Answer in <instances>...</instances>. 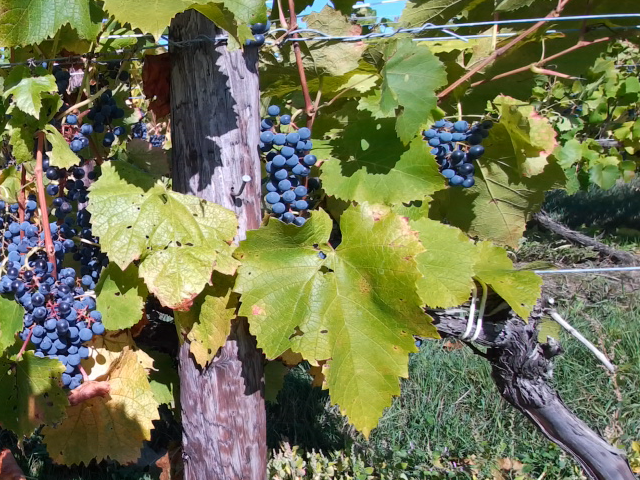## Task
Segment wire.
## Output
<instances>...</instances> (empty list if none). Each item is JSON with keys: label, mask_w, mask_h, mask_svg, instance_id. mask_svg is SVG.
Masks as SVG:
<instances>
[{"label": "wire", "mask_w": 640, "mask_h": 480, "mask_svg": "<svg viewBox=\"0 0 640 480\" xmlns=\"http://www.w3.org/2000/svg\"><path fill=\"white\" fill-rule=\"evenodd\" d=\"M639 12L614 13V14H573L560 16H533L501 19H479L467 23H451L449 25H426L411 29H397L383 32H370L366 34H323L311 36H291L282 38H267V45H284L293 43H313L325 41H368L372 39L394 38L399 36H413L428 32H451L453 30H469L477 27H494L503 25L535 24V23H562L575 21H616L639 19Z\"/></svg>", "instance_id": "d2f4af69"}, {"label": "wire", "mask_w": 640, "mask_h": 480, "mask_svg": "<svg viewBox=\"0 0 640 480\" xmlns=\"http://www.w3.org/2000/svg\"><path fill=\"white\" fill-rule=\"evenodd\" d=\"M227 37L225 35L217 36H199L190 39L170 40L162 42H152L143 45H137L132 47H120L114 49H93L84 52H71L58 55H44V56H31L20 59L4 60L0 63V68L22 66L34 63H46V62H61L73 59H86L95 56H116L122 54H134L155 49H165L172 47H183L198 45L201 43H219L225 42Z\"/></svg>", "instance_id": "a73af890"}, {"label": "wire", "mask_w": 640, "mask_h": 480, "mask_svg": "<svg viewBox=\"0 0 640 480\" xmlns=\"http://www.w3.org/2000/svg\"><path fill=\"white\" fill-rule=\"evenodd\" d=\"M609 271V272H638L640 273V265H611L604 263L586 264L575 267H535V274H577L588 271Z\"/></svg>", "instance_id": "4f2155b8"}]
</instances>
